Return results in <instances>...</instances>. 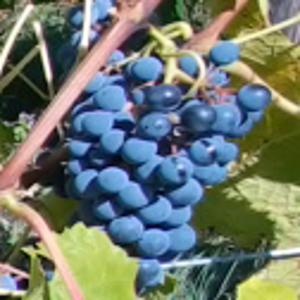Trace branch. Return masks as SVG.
Masks as SVG:
<instances>
[{
    "label": "branch",
    "mask_w": 300,
    "mask_h": 300,
    "mask_svg": "<svg viewBox=\"0 0 300 300\" xmlns=\"http://www.w3.org/2000/svg\"><path fill=\"white\" fill-rule=\"evenodd\" d=\"M162 0H119L113 26L103 35L70 74L67 84L55 95L39 120L27 132L12 158L0 173V192H6L22 173L31 155H35L53 126L69 111L89 79L104 67L116 48L149 24Z\"/></svg>",
    "instance_id": "obj_1"
},
{
    "label": "branch",
    "mask_w": 300,
    "mask_h": 300,
    "mask_svg": "<svg viewBox=\"0 0 300 300\" xmlns=\"http://www.w3.org/2000/svg\"><path fill=\"white\" fill-rule=\"evenodd\" d=\"M248 4V0H235L229 7L222 10L208 24L199 28L191 37L179 45L181 52L197 53L207 51L215 42L216 37Z\"/></svg>",
    "instance_id": "obj_2"
}]
</instances>
